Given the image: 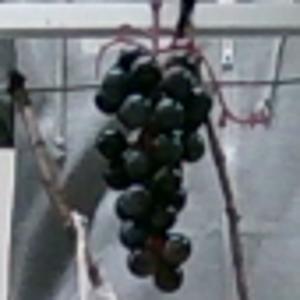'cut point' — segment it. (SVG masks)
<instances>
[{
  "label": "cut point",
  "mask_w": 300,
  "mask_h": 300,
  "mask_svg": "<svg viewBox=\"0 0 300 300\" xmlns=\"http://www.w3.org/2000/svg\"><path fill=\"white\" fill-rule=\"evenodd\" d=\"M164 0H148L147 6L151 11L152 19V60L158 62L159 47V13L161 12Z\"/></svg>",
  "instance_id": "obj_1"
}]
</instances>
